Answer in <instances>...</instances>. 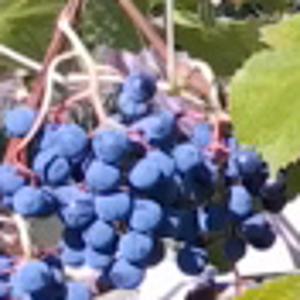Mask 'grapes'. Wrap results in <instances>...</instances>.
Masks as SVG:
<instances>
[{
    "instance_id": "obj_1",
    "label": "grapes",
    "mask_w": 300,
    "mask_h": 300,
    "mask_svg": "<svg viewBox=\"0 0 300 300\" xmlns=\"http://www.w3.org/2000/svg\"><path fill=\"white\" fill-rule=\"evenodd\" d=\"M157 92L153 75L133 70L114 112H102L86 131L74 122L44 121L30 145L29 177L0 166V197L21 219L53 212L64 227L60 254L18 264L0 256V300H95L85 282L65 284L66 269L84 266L101 273L100 291L140 286L147 267L165 262L164 239L184 242L180 270L201 276L211 257L202 231L225 230L235 237L223 244L230 261H240L247 243L266 251L276 241L268 215L288 202V176L266 171L262 156L235 143L219 122L207 118L176 141L179 118L151 111Z\"/></svg>"
},
{
    "instance_id": "obj_2",
    "label": "grapes",
    "mask_w": 300,
    "mask_h": 300,
    "mask_svg": "<svg viewBox=\"0 0 300 300\" xmlns=\"http://www.w3.org/2000/svg\"><path fill=\"white\" fill-rule=\"evenodd\" d=\"M36 110L26 105H14L3 116V129L13 138L25 139L35 121Z\"/></svg>"
}]
</instances>
